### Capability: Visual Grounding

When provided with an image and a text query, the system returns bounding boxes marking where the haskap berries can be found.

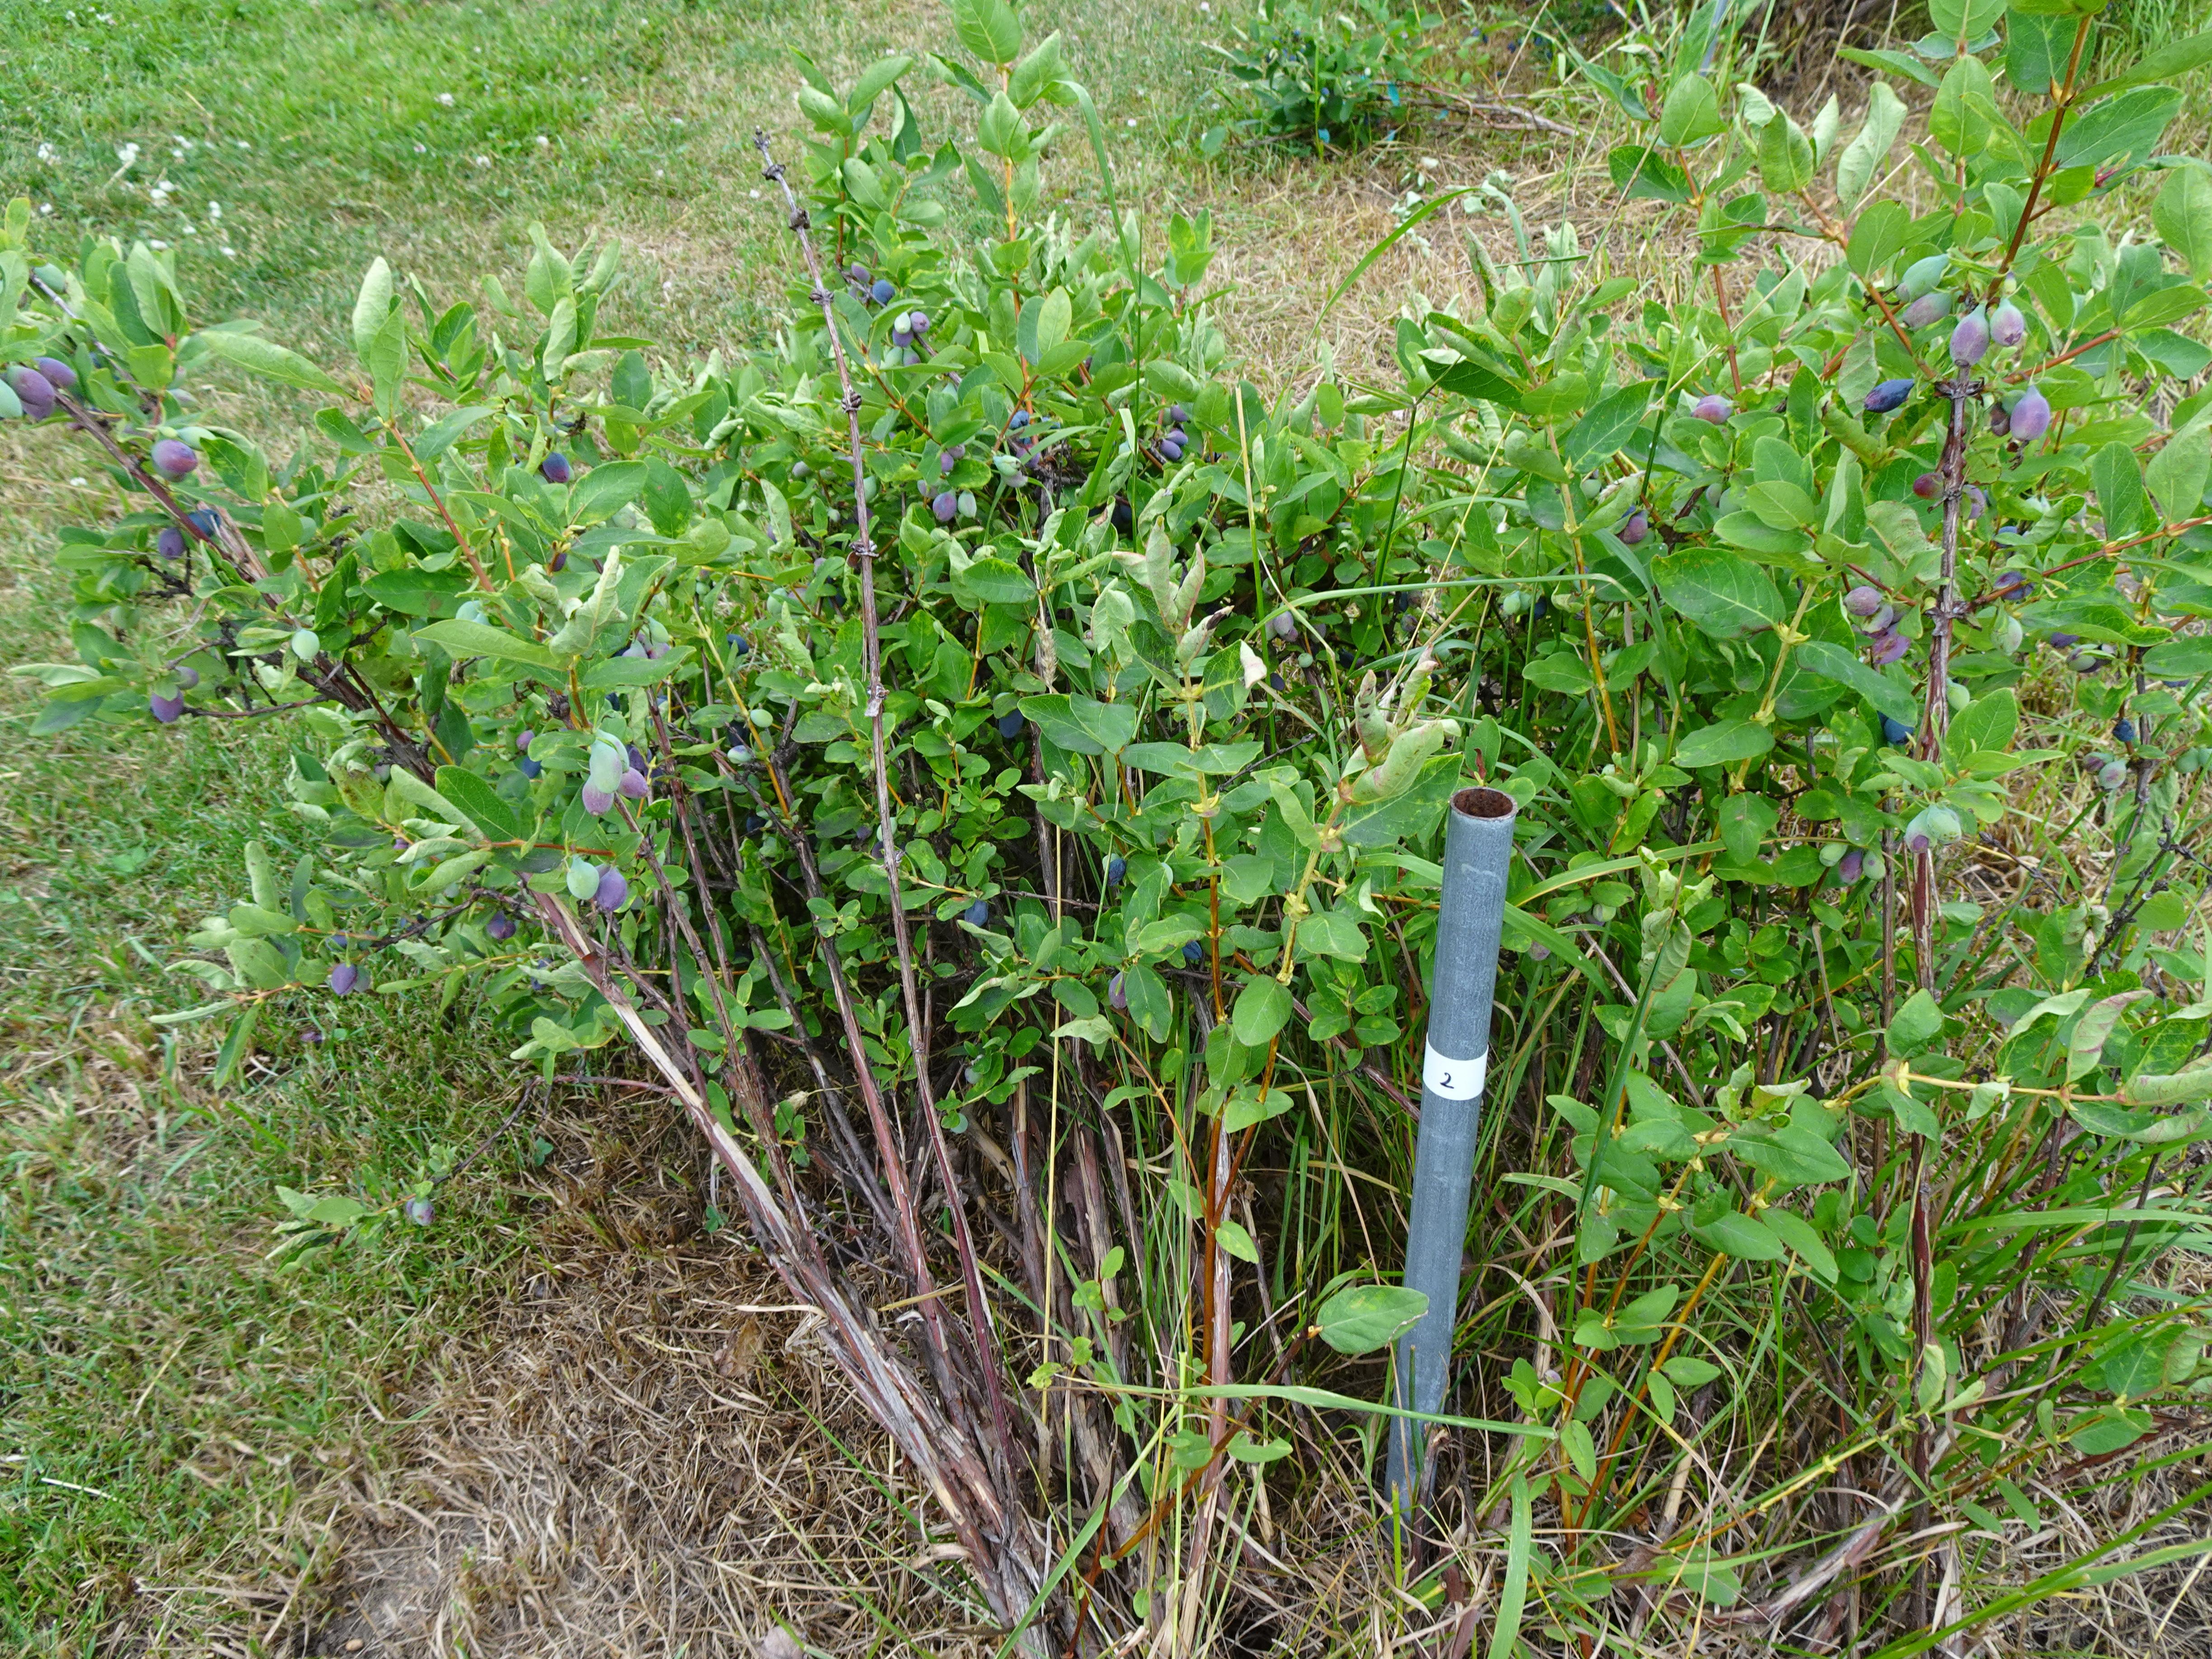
[933,487,956,521]
[948,443,966,460]
[726,744,752,765]
[726,633,748,653]
[1264,618,1275,640]
[2163,679,2189,688]
[637,634,653,652]
[767,526,777,543]
[853,475,877,503]
[399,917,406,928]
[656,695,669,706]
[1863,379,1915,414]
[695,569,708,582]
[1531,596,1547,620]
[1086,355,1094,369]
[416,902,426,924]
[1339,650,1355,667]
[1106,857,1126,888]
[728,721,746,747]
[330,961,355,992]
[1989,298,2026,348]
[1592,903,1617,922]
[1108,971,1131,1010]
[1501,589,1520,615]
[1180,571,1189,584]
[2080,658,2113,673]
[873,278,894,303]
[1120,502,1134,521]
[2096,761,2127,789]
[746,816,765,839]
[625,744,635,752]
[1519,594,1531,612]
[447,884,460,898]
[1886,256,1946,303]
[498,921,516,944]
[361,930,377,935]
[10,367,56,404]
[326,930,349,950]
[695,581,710,594]
[1171,405,1192,422]
[849,262,871,282]
[159,526,185,562]
[827,508,841,523]
[185,509,220,538]
[474,614,492,628]
[910,312,931,333]
[1009,416,1021,429]
[1819,842,1848,866]
[455,599,482,620]
[1870,623,1918,661]
[623,641,650,660]
[1994,573,2033,600]
[1879,712,1888,726]
[520,757,541,778]
[1043,417,1061,429]
[2082,751,2112,772]
[627,746,654,769]
[1400,613,1417,632]
[406,1198,418,1217]
[1949,297,1990,366]
[1527,940,1551,961]
[1164,431,1189,445]
[148,682,181,725]
[1001,471,1028,489]
[940,453,956,472]
[488,910,506,936]
[1276,609,1293,637]
[2050,631,2075,649]
[375,762,391,782]
[2002,383,2049,444]
[397,838,409,844]
[1903,807,1935,856]
[787,587,807,600]
[516,730,536,750]
[1998,526,2017,548]
[749,708,773,728]
[854,506,873,523]
[998,709,1024,738]
[1161,439,1180,462]
[964,898,988,927]
[1159,862,1173,886]
[650,640,670,659]
[903,352,921,367]
[393,842,406,851]
[1101,853,1121,870]
[1298,653,1312,667]
[893,309,911,333]
[1016,411,1028,425]
[2067,643,2100,669]
[533,961,549,993]
[1884,717,1915,745]
[354,964,371,992]
[951,1112,967,1134]
[612,647,628,657]
[591,741,623,795]
[23,398,55,419]
[1020,437,1031,444]
[1281,626,1298,642]
[836,594,847,608]
[1016,447,1041,469]
[1354,654,1367,669]
[877,817,899,841]
[848,481,855,488]
[1690,392,1736,425]
[89,352,101,371]
[647,615,669,642]
[1183,939,1201,960]
[1399,593,1409,611]
[564,857,599,900]
[151,440,195,470]
[792,459,810,477]
[842,517,857,525]
[172,665,200,688]
[991,453,1019,473]
[1857,602,1897,634]
[767,587,787,614]
[2112,717,2135,742]
[1896,286,1961,333]
[960,489,979,519]
[1620,502,1636,518]
[1269,673,1286,689]
[883,346,903,367]
[553,552,567,571]
[648,766,664,786]
[1863,847,1890,881]
[1836,849,1864,889]
[581,767,613,818]
[292,630,320,662]
[1584,909,1604,926]
[541,454,569,483]
[814,558,825,575]
[1913,473,1949,499]
[1963,485,1983,518]
[857,825,873,839]
[1837,585,1885,612]
[964,1067,983,1083]
[1622,512,1649,544]
[412,1198,433,1225]
[892,330,913,347]
[38,355,77,386]
[617,766,649,798]
[1926,804,1964,840]
[592,864,626,915]
[606,693,619,711]
[872,841,885,859]
[1306,623,1326,643]
[918,480,938,498]
[1111,508,1131,534]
